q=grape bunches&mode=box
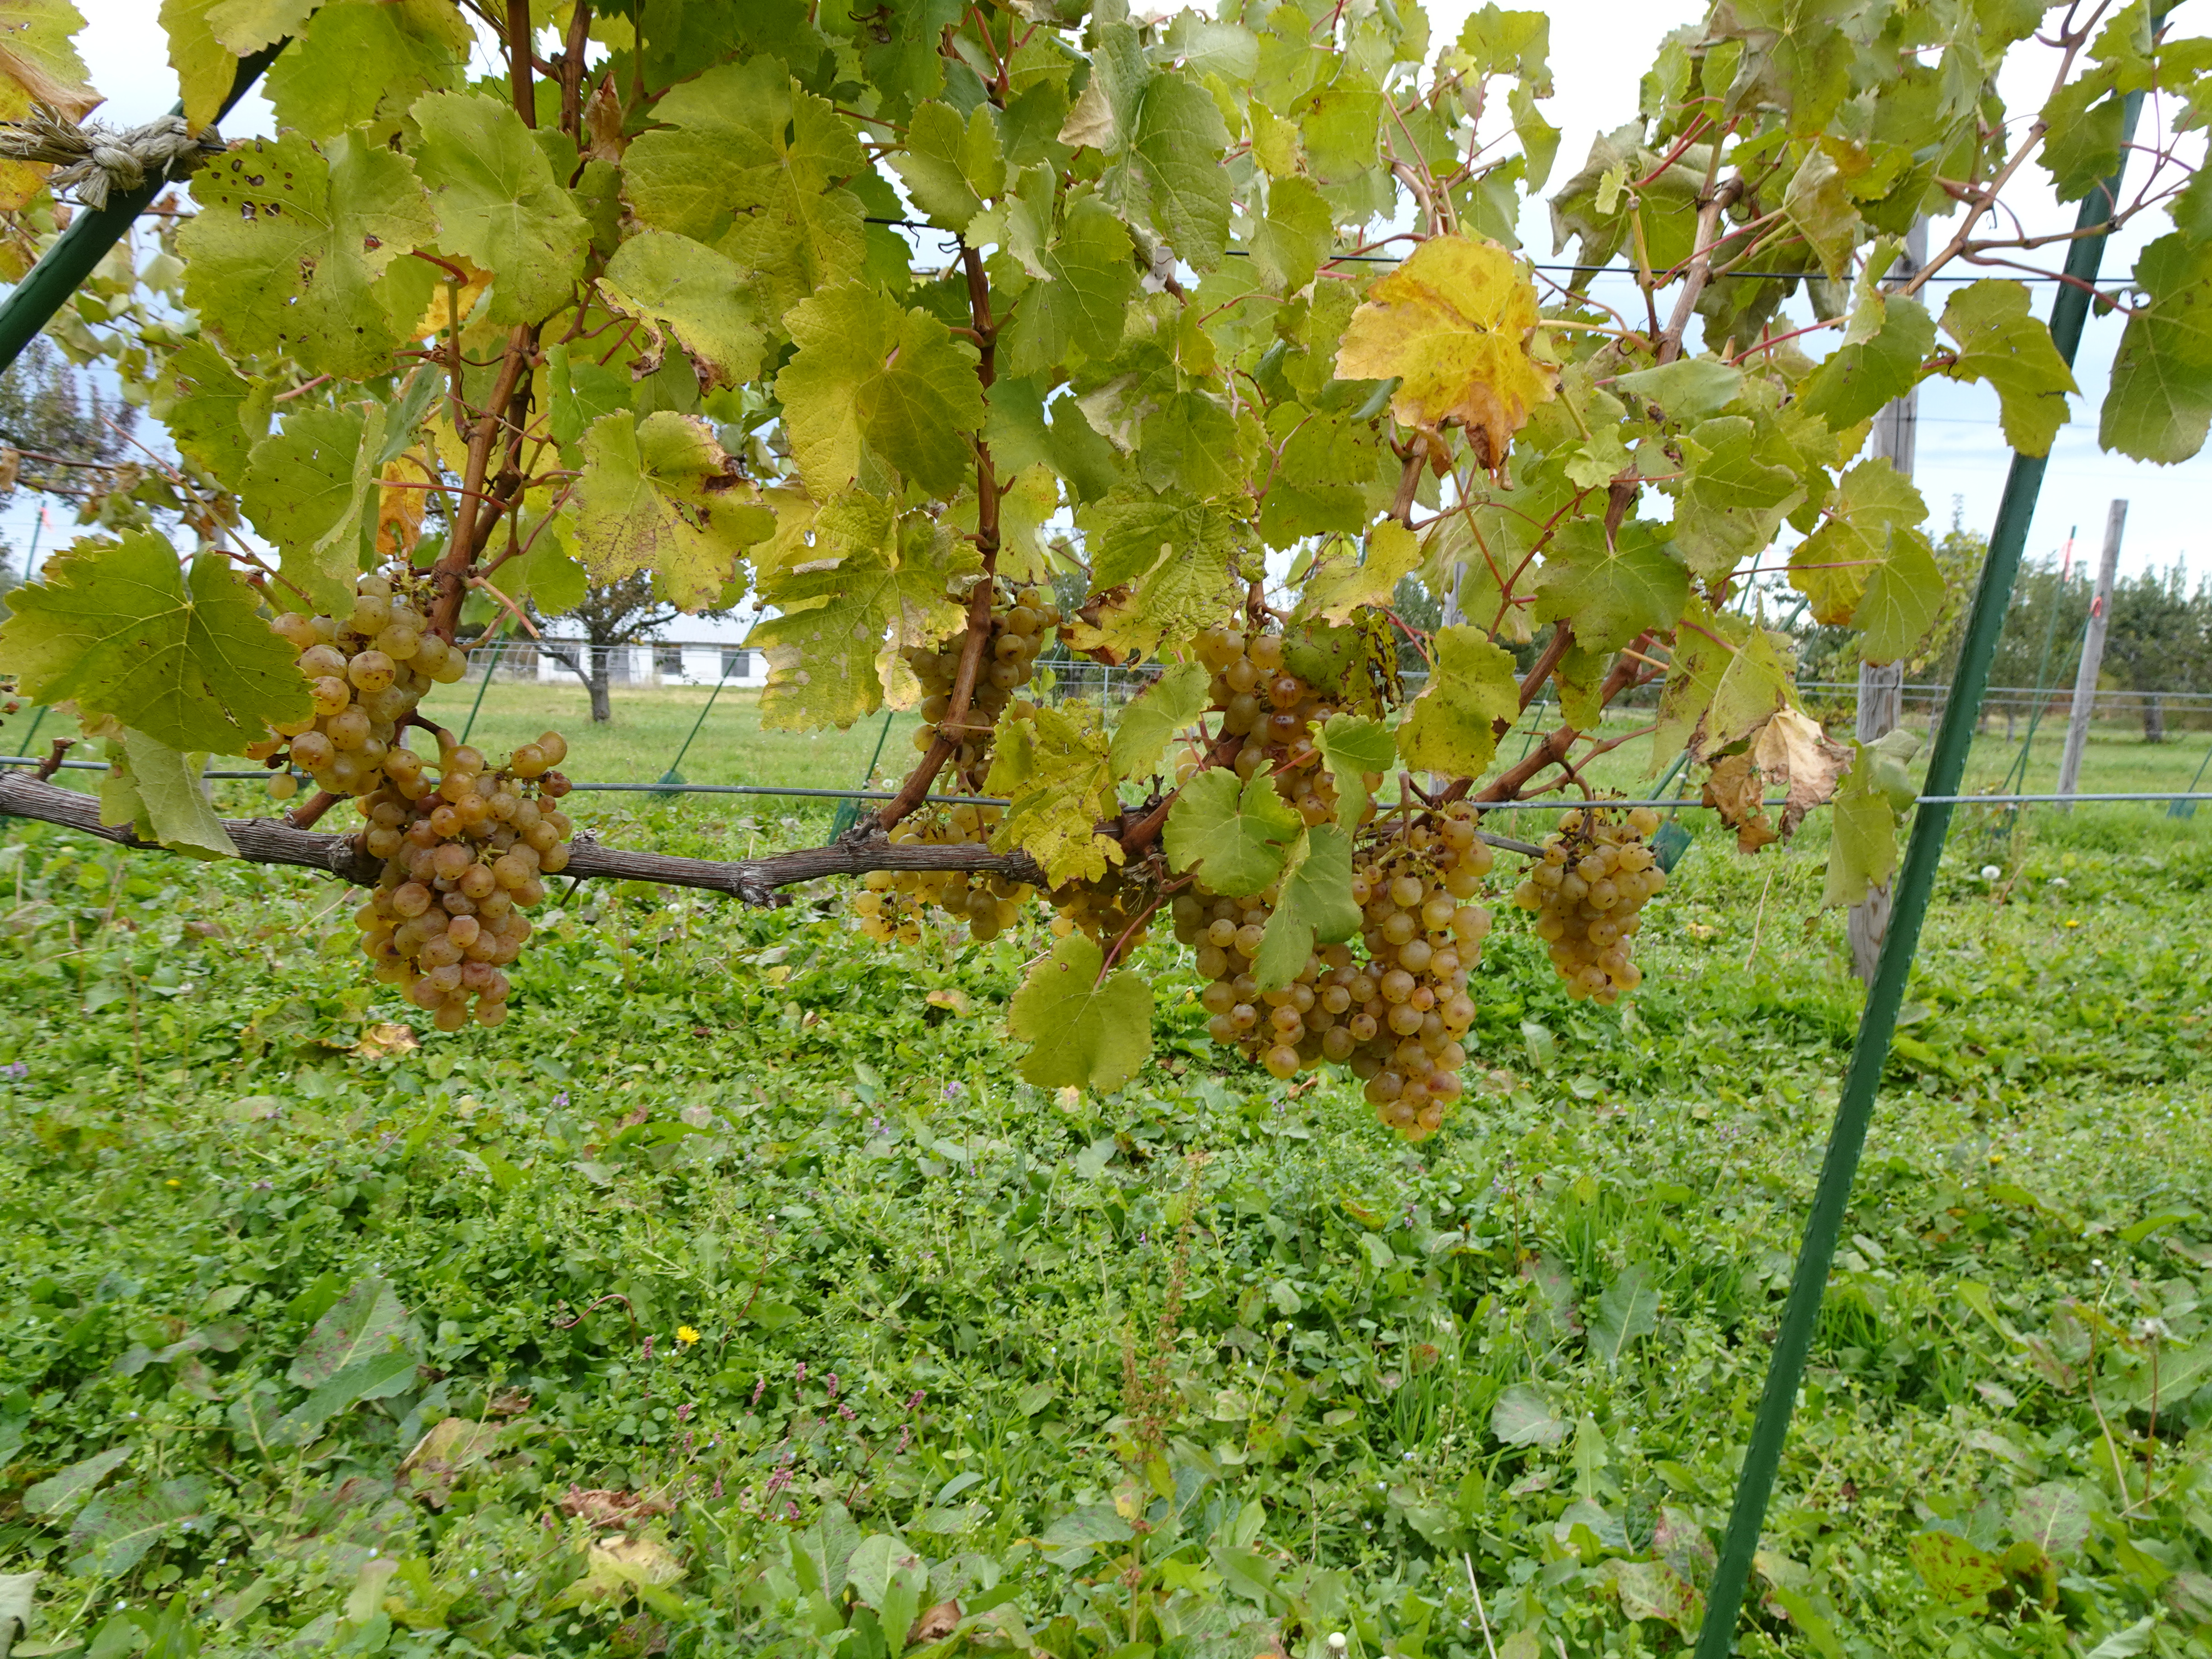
[1349,811,1505,1151]
[259,568,471,807]
[350,820,552,1040]
[1037,865,1162,974]
[897,584,1066,780]
[845,791,1001,947]
[894,817,1045,941]
[1166,842,1381,1084]
[1513,784,1670,1008]
[352,722,582,873]
[1184,616,1387,826]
